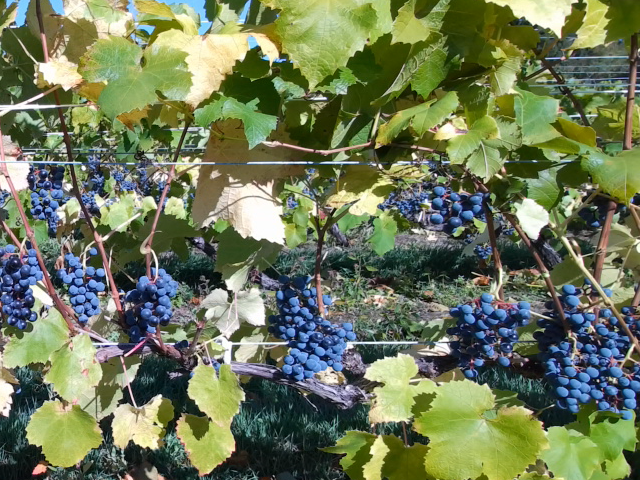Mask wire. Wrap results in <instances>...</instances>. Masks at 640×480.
Wrapping results in <instances>:
<instances>
[{"label": "wire", "instance_id": "obj_1", "mask_svg": "<svg viewBox=\"0 0 640 480\" xmlns=\"http://www.w3.org/2000/svg\"><path fill=\"white\" fill-rule=\"evenodd\" d=\"M36 165V166H52V165H75V166H92V167H105V166H141V165H201V166H285V165H302V166H369V165H395V166H424V165H449V160H422V161H397V160H326V161H298V160H282V161H254V160H241V161H224V160H210L200 162H129L124 160L113 161H77V160H9L1 159L0 165Z\"/></svg>", "mask_w": 640, "mask_h": 480}, {"label": "wire", "instance_id": "obj_2", "mask_svg": "<svg viewBox=\"0 0 640 480\" xmlns=\"http://www.w3.org/2000/svg\"><path fill=\"white\" fill-rule=\"evenodd\" d=\"M461 339H439V340H393V339H377L368 342H351L348 341L349 347H370L379 344L390 345H441V344H461Z\"/></svg>", "mask_w": 640, "mask_h": 480}]
</instances>
